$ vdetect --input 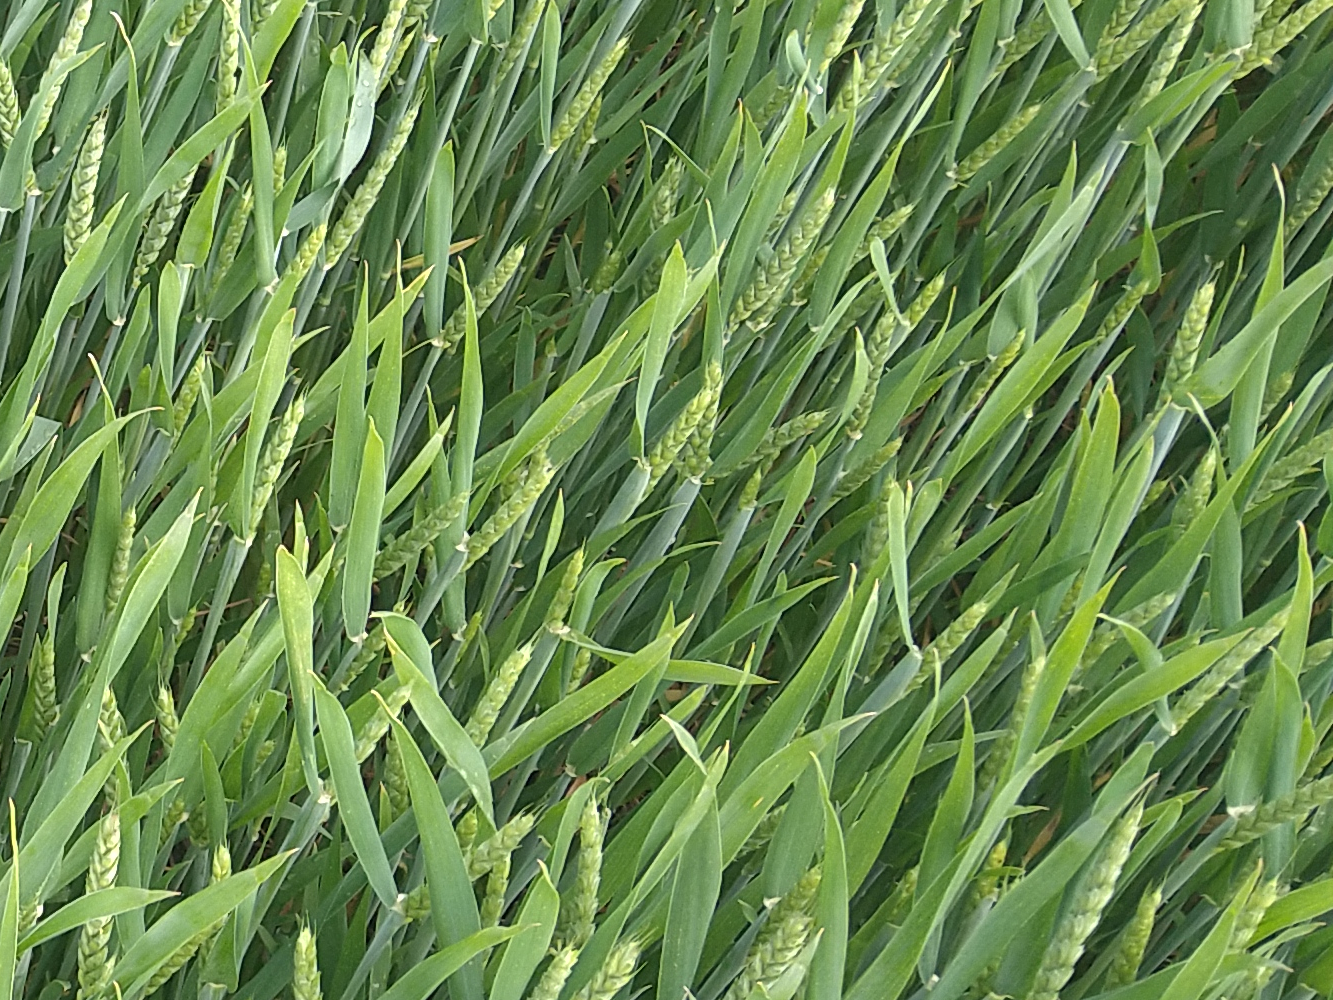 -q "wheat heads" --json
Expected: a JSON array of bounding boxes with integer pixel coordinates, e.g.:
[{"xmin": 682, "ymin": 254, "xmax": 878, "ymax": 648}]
[
  {"xmin": 454, "ymin": 244, "xmax": 526, "ymax": 336},
  {"xmin": 1148, "ymin": 5, "xmax": 1204, "ymax": 102},
  {"xmin": 103, "ymin": 684, "xmax": 125, "ymax": 747},
  {"xmin": 704, "ymin": 411, "xmax": 825, "ymax": 485},
  {"xmin": 1173, "ymin": 447, "xmax": 1220, "ymax": 523},
  {"xmin": 1301, "ymin": 798, "xmax": 1333, "ymax": 838},
  {"xmin": 498, "ymin": 943, "xmax": 644, "ymax": 1000},
  {"xmin": 567, "ymin": 638, "xmax": 592, "ymax": 686},
  {"xmin": 561, "ymin": 801, "xmax": 605, "ymax": 926},
  {"xmin": 368, "ymin": 496, "xmax": 465, "ymax": 579},
  {"xmin": 387, "ymin": 15, "xmax": 417, "ymax": 76},
  {"xmin": 36, "ymin": 0, "xmax": 93, "ymax": 133},
  {"xmin": 336, "ymin": 627, "xmax": 371, "ymax": 695},
  {"xmin": 888, "ymin": 274, "xmax": 946, "ymax": 348},
  {"xmin": 1137, "ymin": 481, "xmax": 1167, "ymax": 514},
  {"xmin": 826, "ymin": 435, "xmax": 908, "ymax": 508},
  {"xmin": 371, "ymin": 0, "xmax": 410, "ymax": 70},
  {"xmin": 749, "ymin": 187, "xmax": 800, "ymax": 282},
  {"xmin": 250, "ymin": 744, "xmax": 275, "ymax": 783},
  {"xmin": 826, "ymin": 0, "xmax": 907, "ymax": 60},
  {"xmin": 560, "ymin": 98, "xmax": 599, "ymax": 178},
  {"xmin": 382, "ymin": 746, "xmax": 410, "ymax": 829},
  {"xmin": 1106, "ymin": 902, "xmax": 1159, "ymax": 992},
  {"xmin": 843, "ymin": 310, "xmax": 894, "ymax": 431},
  {"xmin": 1081, "ymin": 595, "xmax": 1176, "ymax": 662},
  {"xmin": 64, "ymin": 115, "xmax": 108, "ymax": 270},
  {"xmin": 213, "ymin": 842, "xmax": 231, "ymax": 883},
  {"xmin": 136, "ymin": 156, "xmax": 202, "ymax": 291},
  {"xmin": 597, "ymin": 247, "xmax": 620, "ymax": 292},
  {"xmin": 855, "ymin": 528, "xmax": 962, "ymax": 674},
  {"xmin": 170, "ymin": 356, "xmax": 202, "ymax": 450},
  {"xmin": 1008, "ymin": 655, "xmax": 1049, "ymax": 786},
  {"xmin": 166, "ymin": 0, "xmax": 238, "ymax": 40},
  {"xmin": 156, "ymin": 684, "xmax": 186, "ymax": 756},
  {"xmin": 1219, "ymin": 777, "xmax": 1333, "ymax": 849},
  {"xmin": 285, "ymin": 225, "xmax": 327, "ymax": 267},
  {"xmin": 650, "ymin": 388, "xmax": 713, "ymax": 483},
  {"xmin": 395, "ymin": 814, "xmax": 536, "ymax": 921},
  {"xmin": 1296, "ymin": 750, "xmax": 1333, "ymax": 785},
  {"xmin": 211, "ymin": 182, "xmax": 255, "ymax": 288},
  {"xmin": 34, "ymin": 634, "xmax": 59, "ymax": 747},
  {"xmin": 797, "ymin": 208, "xmax": 913, "ymax": 299},
  {"xmin": 77, "ymin": 813, "xmax": 121, "ymax": 1000},
  {"xmin": 888, "ymin": 868, "xmax": 927, "ymax": 921},
  {"xmin": 1023, "ymin": 795, "xmax": 1142, "ymax": 1000},
  {"xmin": 1164, "ymin": 603, "xmax": 1288, "ymax": 720},
  {"xmin": 742, "ymin": 276, "xmax": 792, "ymax": 321},
  {"xmin": 956, "ymin": 839, "xmax": 1009, "ymax": 938},
  {"xmin": 1229, "ymin": 0, "xmax": 1333, "ymax": 78},
  {"xmin": 552, "ymin": 547, "xmax": 584, "ymax": 629},
  {"xmin": 492, "ymin": 0, "xmax": 548, "ymax": 95},
  {"xmin": 1106, "ymin": 0, "xmax": 1198, "ymax": 77},
  {"xmin": 998, "ymin": 0, "xmax": 1095, "ymax": 74},
  {"xmin": 960, "ymin": 720, "xmax": 1011, "ymax": 791},
  {"xmin": 1158, "ymin": 281, "xmax": 1215, "ymax": 414},
  {"xmin": 744, "ymin": 864, "xmax": 823, "ymax": 952},
  {"xmin": 1104, "ymin": 279, "xmax": 1148, "ymax": 350},
  {"xmin": 459, "ymin": 455, "xmax": 548, "ymax": 575},
  {"xmin": 352, "ymin": 687, "xmax": 413, "ymax": 763},
  {"xmin": 271, "ymin": 144, "xmax": 287, "ymax": 204},
  {"xmin": 560, "ymin": 34, "xmax": 630, "ymax": 149},
  {"xmin": 645, "ymin": 170, "xmax": 676, "ymax": 230},
  {"xmin": 643, "ymin": 239, "xmax": 671, "ymax": 295},
  {"xmin": 846, "ymin": 0, "xmax": 932, "ymax": 108},
  {"xmin": 493, "ymin": 945, "xmax": 577, "ymax": 1000},
  {"xmin": 224, "ymin": 697, "xmax": 261, "ymax": 753},
  {"xmin": 1207, "ymin": 378, "xmax": 1291, "ymax": 454},
  {"xmin": 215, "ymin": 0, "xmax": 243, "ymax": 108},
  {"xmin": 1236, "ymin": 428, "xmax": 1333, "ymax": 512},
  {"xmin": 688, "ymin": 364, "xmax": 724, "ymax": 485},
  {"xmin": 0, "ymin": 59, "xmax": 33, "ymax": 193},
  {"xmin": 1281, "ymin": 149, "xmax": 1333, "ymax": 245},
  {"xmin": 478, "ymin": 854, "xmax": 510, "ymax": 948},
  {"xmin": 669, "ymin": 927, "xmax": 807, "ymax": 1000},
  {"xmin": 734, "ymin": 804, "xmax": 786, "ymax": 851},
  {"xmin": 324, "ymin": 77, "xmax": 428, "ymax": 273},
  {"xmin": 726, "ymin": 193, "xmax": 838, "ymax": 317},
  {"xmin": 110, "ymin": 508, "xmax": 138, "ymax": 621},
  {"xmin": 400, "ymin": 0, "xmax": 484, "ymax": 31},
  {"xmin": 918, "ymin": 602, "xmax": 987, "ymax": 689},
  {"xmin": 292, "ymin": 929, "xmax": 328, "ymax": 1000},
  {"xmin": 960, "ymin": 107, "xmax": 1041, "ymax": 178},
  {"xmin": 95, "ymin": 718, "xmax": 120, "ymax": 804},
  {"xmin": 1232, "ymin": 885, "xmax": 1281, "ymax": 952},
  {"xmin": 753, "ymin": 442, "xmax": 781, "ymax": 508},
  {"xmin": 858, "ymin": 479, "xmax": 899, "ymax": 580},
  {"xmin": 155, "ymin": 801, "xmax": 186, "ymax": 840},
  {"xmin": 452, "ymin": 810, "xmax": 478, "ymax": 851},
  {"xmin": 463, "ymin": 645, "xmax": 535, "ymax": 747},
  {"xmin": 259, "ymin": 394, "xmax": 304, "ymax": 524},
  {"xmin": 811, "ymin": 0, "xmax": 887, "ymax": 43},
  {"xmin": 1259, "ymin": 0, "xmax": 1309, "ymax": 19},
  {"xmin": 962, "ymin": 329, "xmax": 1029, "ymax": 425},
  {"xmin": 1114, "ymin": 0, "xmax": 1187, "ymax": 36},
  {"xmin": 150, "ymin": 912, "xmax": 228, "ymax": 990},
  {"xmin": 968, "ymin": 956, "xmax": 999, "ymax": 988},
  {"xmin": 1043, "ymin": 564, "xmax": 1088, "ymax": 633},
  {"xmin": 187, "ymin": 797, "xmax": 211, "ymax": 850}
]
